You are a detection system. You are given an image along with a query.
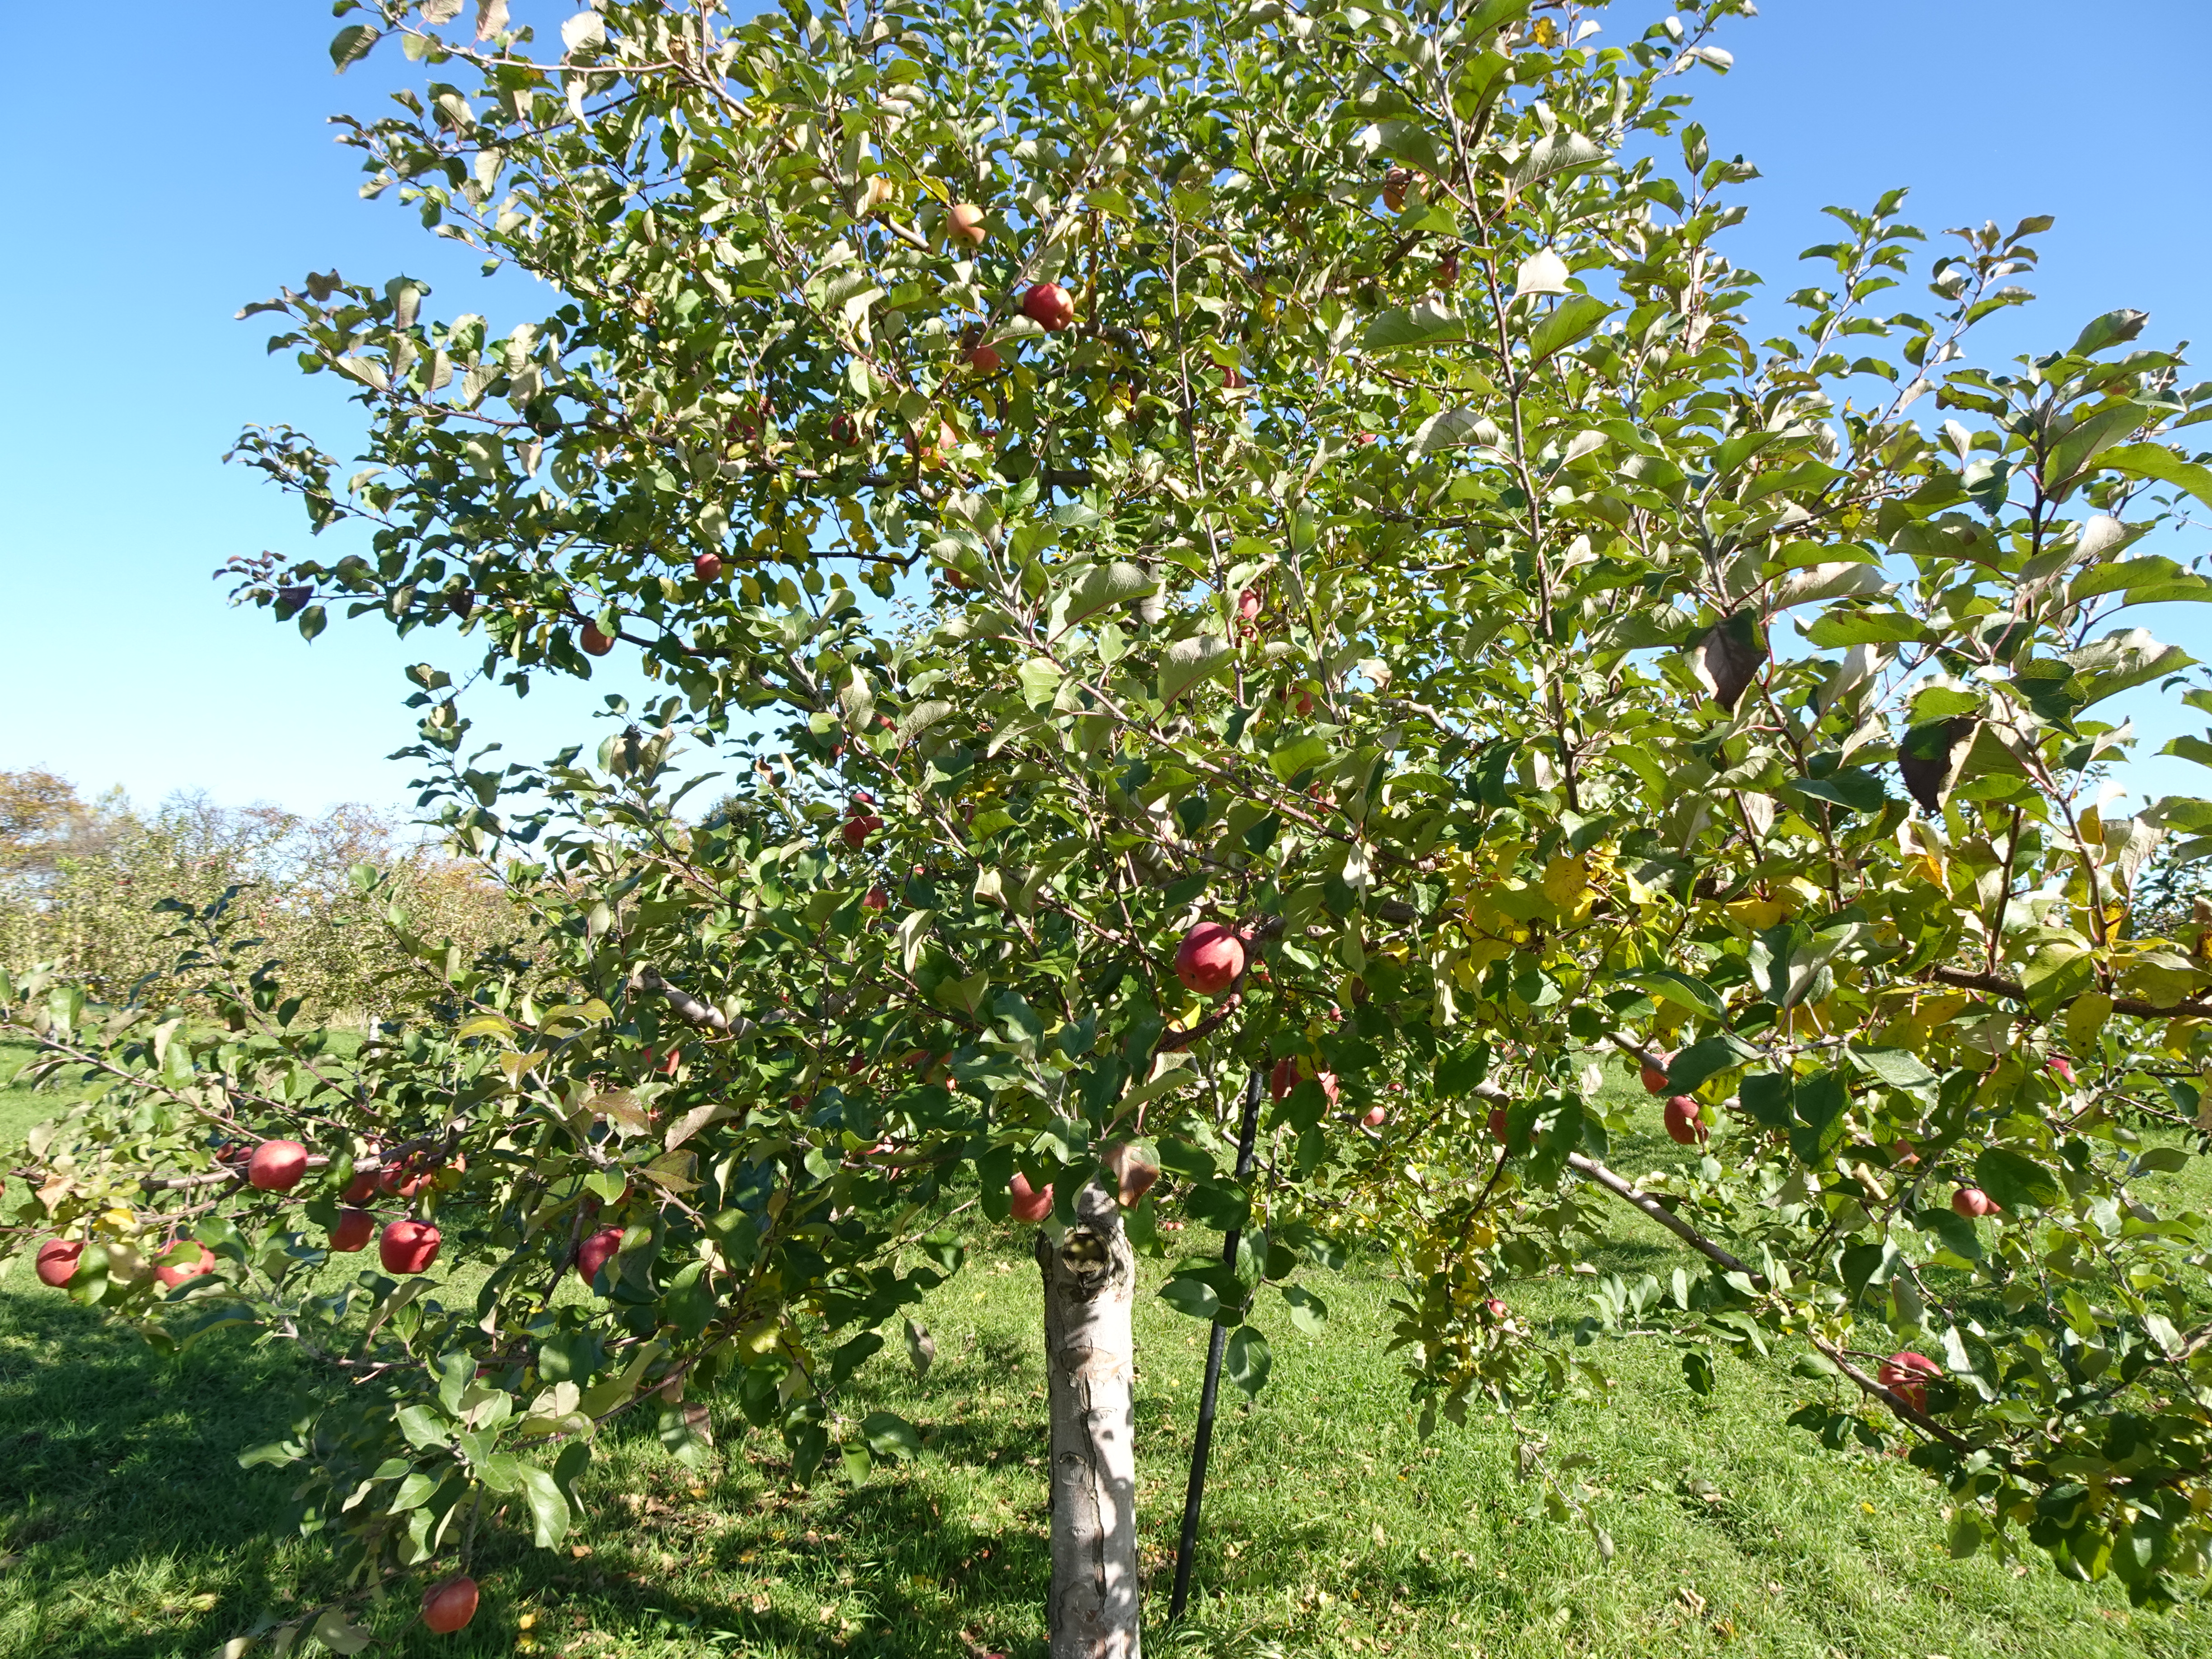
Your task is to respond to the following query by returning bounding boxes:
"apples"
[1351,431,1376,446]
[1254,960,1272,983]
[1230,924,1254,940]
[1640,1047,1677,1095]
[694,554,722,581]
[36,1238,87,1289]
[1983,1198,2001,1216]
[215,1144,234,1162]
[1281,684,1313,717]
[1111,383,1142,418]
[1328,1008,1341,1021]
[1235,628,1257,660]
[476,1368,491,1378]
[235,1147,254,1165]
[1484,1299,1507,1318]
[429,1152,465,1190]
[1009,1172,1054,1223]
[1388,1083,1403,1092]
[580,621,614,656]
[1174,922,1244,996]
[716,394,770,440]
[1664,1095,1708,1144]
[926,1073,955,1092]
[947,203,986,248]
[1122,1013,1187,1081]
[1383,165,1428,212]
[849,1054,880,1085]
[380,1220,441,1274]
[381,1161,397,1194]
[643,1047,679,1076]
[853,793,873,805]
[423,1577,478,1633]
[392,1151,431,1196]
[844,806,883,848]
[904,420,957,470]
[946,568,974,590]
[1364,1106,1385,1126]
[1488,1110,1509,1146]
[1023,282,1074,332]
[1878,1352,1943,1414]
[328,1213,375,1252]
[615,1186,635,1206]
[158,1239,215,1288]
[782,1094,811,1110]
[863,887,888,910]
[342,1172,380,1202]
[939,1050,952,1063]
[828,726,848,757]
[578,1229,624,1287]
[1209,756,1231,782]
[1232,591,1258,629]
[1431,257,1459,288]
[1270,1061,1338,1118]
[1310,783,1336,814]
[979,429,997,452]
[249,1140,308,1192]
[1894,1139,1920,1166]
[1952,1188,1988,1217]
[1233,372,1246,388]
[900,867,927,908]
[831,414,859,447]
[872,713,898,735]
[2041,1059,2076,1091]
[965,343,1000,373]
[905,1050,929,1067]
[1205,359,1234,388]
